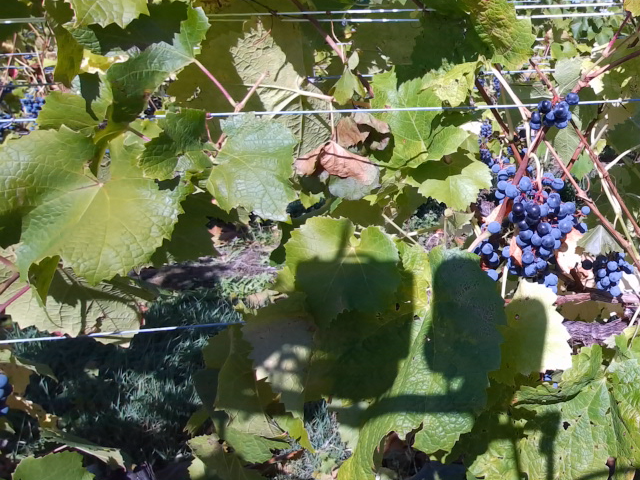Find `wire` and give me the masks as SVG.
Instances as JSON below:
<instances>
[{"label": "wire", "mask_w": 640, "mask_h": 480, "mask_svg": "<svg viewBox=\"0 0 640 480\" xmlns=\"http://www.w3.org/2000/svg\"><path fill=\"white\" fill-rule=\"evenodd\" d=\"M524 108H536V103H523L519 102L511 105H499V104H481L469 107H443V106H415V107H402V108H382V109H360V108H326L323 110H305L302 112H268V111H253L251 109H239L231 111H213L208 112V117L215 116H233L248 114L251 116H266V117H304L307 115H325L328 113H357V114H384V113H404V112H417V111H441V112H472L484 109H497V110H513Z\"/></svg>", "instance_id": "obj_1"}, {"label": "wire", "mask_w": 640, "mask_h": 480, "mask_svg": "<svg viewBox=\"0 0 640 480\" xmlns=\"http://www.w3.org/2000/svg\"><path fill=\"white\" fill-rule=\"evenodd\" d=\"M243 323L242 319L234 320V321H225V322H213V323H188L179 326H163V327H146V328H137V329H122L115 331H107V332H94L81 334V339H89L96 337H110L124 334H140V333H148V332H165V331H181L190 328H215V327H227V326H236L241 325Z\"/></svg>", "instance_id": "obj_2"}, {"label": "wire", "mask_w": 640, "mask_h": 480, "mask_svg": "<svg viewBox=\"0 0 640 480\" xmlns=\"http://www.w3.org/2000/svg\"><path fill=\"white\" fill-rule=\"evenodd\" d=\"M68 335H59L55 337H29L26 339H0V344H28L32 342H57L68 340Z\"/></svg>", "instance_id": "obj_3"}, {"label": "wire", "mask_w": 640, "mask_h": 480, "mask_svg": "<svg viewBox=\"0 0 640 480\" xmlns=\"http://www.w3.org/2000/svg\"><path fill=\"white\" fill-rule=\"evenodd\" d=\"M633 101H634V98L629 97V98H620V99H605V100H598V101L579 100L578 104L581 106H600V105H607V104L632 103Z\"/></svg>", "instance_id": "obj_4"}]
</instances>
